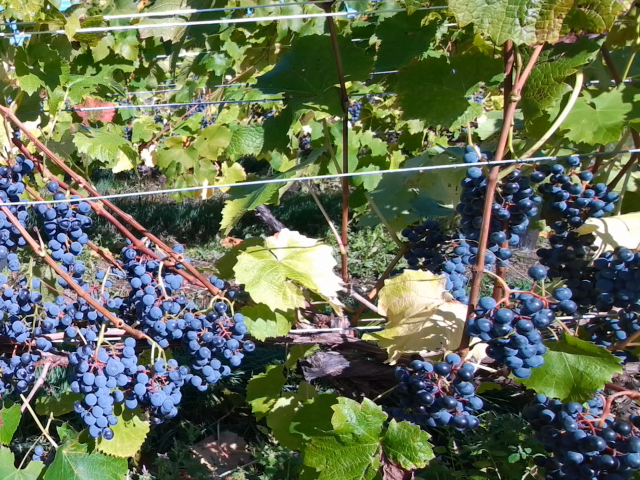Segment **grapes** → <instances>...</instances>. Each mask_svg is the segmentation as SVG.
Here are the masks:
<instances>
[{"instance_id": "grapes-1", "label": "grapes", "mask_w": 640, "mask_h": 480, "mask_svg": "<svg viewBox=\"0 0 640 480\" xmlns=\"http://www.w3.org/2000/svg\"><path fill=\"white\" fill-rule=\"evenodd\" d=\"M138 252L131 246L122 248V259H116L124 263V272L128 275L131 287L136 292L129 294V299L135 303V310L141 323V331L148 333L162 349L169 347L170 339H180L187 343V350L193 358L192 368L199 377L191 373L188 365L179 366L176 359L158 358L153 366L156 375H167L170 379L168 385L156 382L154 388H149L152 379L146 372L143 364H138L136 356V339L127 337L122 348V356H110L105 348L98 350V358L106 363L104 369H98L96 374L89 372L88 360L93 356V346L96 337L95 320H100L102 315L85 299L78 297L67 303L62 295H56L54 302L47 300L43 305L46 316L41 321V326L34 329L36 347L41 351H52L54 343L46 339L43 334H55L60 311H66L60 317V322L66 326L64 334L68 338H74L78 329L72 323V319H85V326L79 328V333L85 336L84 346H79L77 352L69 355V362L73 365V371L68 373L67 383L72 392L85 393V402L75 400L73 408L81 415V419L89 425V434L92 437L100 435L105 440L113 437V430L109 425H116L118 418L114 415L113 403H122L125 408L135 410L138 403H150L152 420L156 424H163L166 420H173L178 415V404L182 400L181 387L184 381L192 384L198 391H207L211 384H218L224 377L232 374L228 364H223L219 358L214 357V352H221L224 358L235 367H240L246 353L255 351V343L245 340L240 343L248 331L243 314L233 316L232 335L229 340L223 338L221 325L216 322L220 313L227 311V304L218 301L215 310L207 315H199L196 318L194 312H187L184 318H171L161 321L163 310L155 306L158 301V292L153 287L157 279L150 273L157 266V261L142 259L137 261ZM39 350L25 351L23 354H14L11 358L0 356V371L4 377L16 376V392L25 394L30 389V383L34 381L35 362L41 359ZM133 387L131 393L116 389L115 386Z\"/></svg>"}, {"instance_id": "grapes-2", "label": "grapes", "mask_w": 640, "mask_h": 480, "mask_svg": "<svg viewBox=\"0 0 640 480\" xmlns=\"http://www.w3.org/2000/svg\"><path fill=\"white\" fill-rule=\"evenodd\" d=\"M562 163L538 164L530 172L529 179L539 185L542 197L534 193L529 179L514 169L507 175V183L503 187L502 196L515 206L504 207L499 193L495 194L494 210L489 222L487 256L485 268L492 269V264L507 266L512 250L499 249L498 242L508 241L517 245L520 236L527 234L530 217H543L548 228L556 234L577 230L590 217L599 218L615 209V202L620 199L616 191H609L604 183H596L592 189L581 184H572L565 173Z\"/></svg>"}, {"instance_id": "grapes-3", "label": "grapes", "mask_w": 640, "mask_h": 480, "mask_svg": "<svg viewBox=\"0 0 640 480\" xmlns=\"http://www.w3.org/2000/svg\"><path fill=\"white\" fill-rule=\"evenodd\" d=\"M535 406L525 409V420L543 440L547 452L555 451L545 466V480H621L630 478L640 468V439L631 437L623 456L600 455L607 442L618 436H629L632 427L626 421L607 416L603 421L601 436L580 429L576 419L583 413L579 402L549 400L546 394L532 398Z\"/></svg>"}, {"instance_id": "grapes-4", "label": "grapes", "mask_w": 640, "mask_h": 480, "mask_svg": "<svg viewBox=\"0 0 640 480\" xmlns=\"http://www.w3.org/2000/svg\"><path fill=\"white\" fill-rule=\"evenodd\" d=\"M570 286H555L552 297L559 301L544 308L543 301L533 293L512 292V300H521L522 308H499L489 313L496 304L492 297L483 296L476 307V318L466 320L467 333L482 339L488 346L485 354L490 360L501 361L518 378H527L532 367L545 363L547 347L542 343L540 328H548L556 321L559 310L565 315L577 311L571 299Z\"/></svg>"}, {"instance_id": "grapes-5", "label": "grapes", "mask_w": 640, "mask_h": 480, "mask_svg": "<svg viewBox=\"0 0 640 480\" xmlns=\"http://www.w3.org/2000/svg\"><path fill=\"white\" fill-rule=\"evenodd\" d=\"M459 354L449 352L445 362L439 360L436 365L415 358L410 366L404 363L396 366V377L400 384L399 401L405 408H411L415 413H423V421L433 428L440 423L449 425L454 421L458 431L467 427L476 429L480 420L471 411L480 410L483 400L475 394L473 374L476 368L471 362H462ZM458 375L452 378V387L456 390L454 397L449 395L435 398L438 385L428 379L427 373L447 376L453 366Z\"/></svg>"}, {"instance_id": "grapes-6", "label": "grapes", "mask_w": 640, "mask_h": 480, "mask_svg": "<svg viewBox=\"0 0 640 480\" xmlns=\"http://www.w3.org/2000/svg\"><path fill=\"white\" fill-rule=\"evenodd\" d=\"M594 288L598 312L620 309L618 319H593L585 326L593 341L603 346L620 344L640 329V252L617 246L595 260Z\"/></svg>"}, {"instance_id": "grapes-7", "label": "grapes", "mask_w": 640, "mask_h": 480, "mask_svg": "<svg viewBox=\"0 0 640 480\" xmlns=\"http://www.w3.org/2000/svg\"><path fill=\"white\" fill-rule=\"evenodd\" d=\"M487 178L479 167H468L466 177L461 179L462 194L456 211L462 216L461 232L458 235L459 246L455 248L456 257L448 256L439 265V273L445 277V289L455 299L467 306L466 295L468 277L464 274L465 266L476 262L478 251V235L480 230V214L484 208V196Z\"/></svg>"}, {"instance_id": "grapes-8", "label": "grapes", "mask_w": 640, "mask_h": 480, "mask_svg": "<svg viewBox=\"0 0 640 480\" xmlns=\"http://www.w3.org/2000/svg\"><path fill=\"white\" fill-rule=\"evenodd\" d=\"M35 211L45 220L43 221L44 231L49 236L47 247L52 251L54 260H62L60 267L67 273L72 272L74 279L85 291L89 290V284L83 282L82 275L85 272L84 263L75 259L74 256L83 253V245L89 241L87 232H82L81 228L90 229L93 225L91 216L85 213L91 211L88 202H79L78 209L68 207V204H56L54 207L47 205H34ZM66 231L72 239L77 241L70 243L71 253H65L67 241Z\"/></svg>"}, {"instance_id": "grapes-9", "label": "grapes", "mask_w": 640, "mask_h": 480, "mask_svg": "<svg viewBox=\"0 0 640 480\" xmlns=\"http://www.w3.org/2000/svg\"><path fill=\"white\" fill-rule=\"evenodd\" d=\"M4 295L8 300H4L0 296V320L3 319L4 312L9 315L8 320L2 325V334L17 345H23L30 336V329L18 319V314L30 312L32 310L31 304H39L42 301V293L28 288L14 291L12 287H6Z\"/></svg>"}, {"instance_id": "grapes-10", "label": "grapes", "mask_w": 640, "mask_h": 480, "mask_svg": "<svg viewBox=\"0 0 640 480\" xmlns=\"http://www.w3.org/2000/svg\"><path fill=\"white\" fill-rule=\"evenodd\" d=\"M34 168L32 162L25 159L23 154L16 156V163L0 167V203L29 202L26 198L20 199L19 195L25 191L22 176Z\"/></svg>"}, {"instance_id": "grapes-11", "label": "grapes", "mask_w": 640, "mask_h": 480, "mask_svg": "<svg viewBox=\"0 0 640 480\" xmlns=\"http://www.w3.org/2000/svg\"><path fill=\"white\" fill-rule=\"evenodd\" d=\"M27 241L19 233L11 221L0 211V261L7 258L8 269L18 271L20 269L19 256L10 249L26 247Z\"/></svg>"}, {"instance_id": "grapes-12", "label": "grapes", "mask_w": 640, "mask_h": 480, "mask_svg": "<svg viewBox=\"0 0 640 480\" xmlns=\"http://www.w3.org/2000/svg\"><path fill=\"white\" fill-rule=\"evenodd\" d=\"M184 304L186 310H193L195 308V302L193 300H187L185 295H179L176 298L165 300L162 303V308L165 311H171L172 313H179L181 311V305Z\"/></svg>"}, {"instance_id": "grapes-13", "label": "grapes", "mask_w": 640, "mask_h": 480, "mask_svg": "<svg viewBox=\"0 0 640 480\" xmlns=\"http://www.w3.org/2000/svg\"><path fill=\"white\" fill-rule=\"evenodd\" d=\"M588 408L590 410L585 414V417L588 420H595L596 418H598L601 415L603 409L602 398L600 396H595L589 401Z\"/></svg>"}, {"instance_id": "grapes-14", "label": "grapes", "mask_w": 640, "mask_h": 480, "mask_svg": "<svg viewBox=\"0 0 640 480\" xmlns=\"http://www.w3.org/2000/svg\"><path fill=\"white\" fill-rule=\"evenodd\" d=\"M103 297L106 300L105 301V306L107 308H115V309H120L123 306V299L119 296H114L113 298L109 299V294L107 291L103 292Z\"/></svg>"}, {"instance_id": "grapes-15", "label": "grapes", "mask_w": 640, "mask_h": 480, "mask_svg": "<svg viewBox=\"0 0 640 480\" xmlns=\"http://www.w3.org/2000/svg\"><path fill=\"white\" fill-rule=\"evenodd\" d=\"M59 185L56 181H51L48 183V190L54 193V199H65V193L63 191H58Z\"/></svg>"}]
</instances>
